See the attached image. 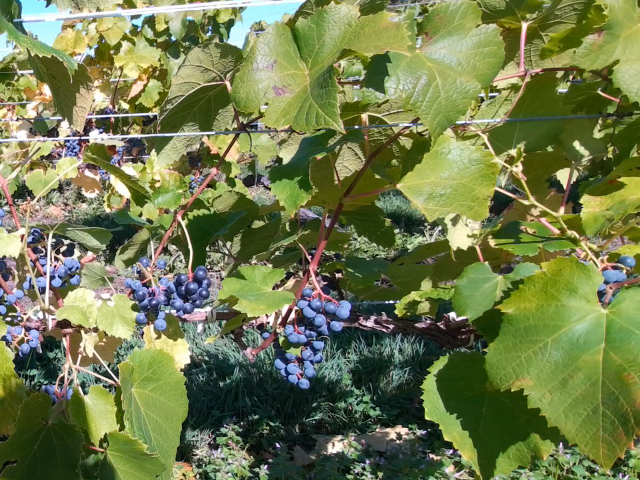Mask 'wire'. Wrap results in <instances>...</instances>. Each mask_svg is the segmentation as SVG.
<instances>
[{
  "label": "wire",
  "instance_id": "3",
  "mask_svg": "<svg viewBox=\"0 0 640 480\" xmlns=\"http://www.w3.org/2000/svg\"><path fill=\"white\" fill-rule=\"evenodd\" d=\"M421 121H406V122H395V123H363L357 125H346V130H359L365 128H398V127H408V126H421Z\"/></svg>",
  "mask_w": 640,
  "mask_h": 480
},
{
  "label": "wire",
  "instance_id": "1",
  "mask_svg": "<svg viewBox=\"0 0 640 480\" xmlns=\"http://www.w3.org/2000/svg\"><path fill=\"white\" fill-rule=\"evenodd\" d=\"M262 133H272L277 134L278 130L275 128H262L259 130H251V129H235V130H216L211 129L208 131L193 133V132H181V131H167V132H158L152 134H133V133H108V134H100V135H80V136H59V137H41V138H15V139H5L0 138V143L3 144H17V143H44V142H72V141H82V140H102V139H111V138H131V139H154L160 137H169V136H179V137H191V138H200L211 135H238V134H248V135H261Z\"/></svg>",
  "mask_w": 640,
  "mask_h": 480
},
{
  "label": "wire",
  "instance_id": "2",
  "mask_svg": "<svg viewBox=\"0 0 640 480\" xmlns=\"http://www.w3.org/2000/svg\"><path fill=\"white\" fill-rule=\"evenodd\" d=\"M594 117H603L609 118L610 114L605 112H592L585 114H575L570 116L565 115H548V116H531V117H520V116H509V117H495V118H478L471 120H457V125H474L480 123H506V122H533V121H550V120H563V121H573L577 119H587Z\"/></svg>",
  "mask_w": 640,
  "mask_h": 480
}]
</instances>
